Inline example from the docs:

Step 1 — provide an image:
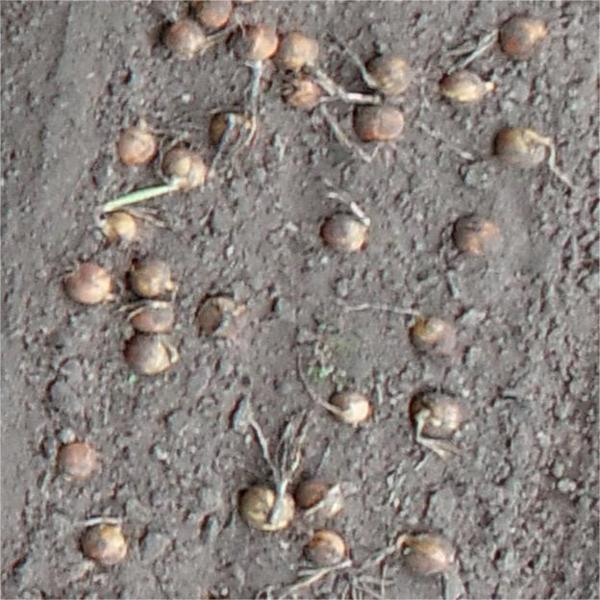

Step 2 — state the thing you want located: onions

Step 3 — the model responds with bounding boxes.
[233,25,277,62]
[284,75,320,111]
[499,127,546,165]
[277,31,318,69]
[320,209,366,251]
[129,300,172,333]
[326,388,367,424]
[240,484,293,529]
[353,101,400,141]
[100,210,136,244]
[454,215,497,257]
[162,146,201,185]
[212,112,248,150]
[367,51,409,95]
[127,336,177,375]
[401,532,451,579]
[166,19,206,58]
[130,259,171,297]
[80,519,125,563]
[65,262,110,304]
[296,476,326,507]
[499,13,547,58]
[414,392,466,437]
[304,529,344,566]
[56,440,98,481]
[115,126,154,164]
[196,0,229,33]
[443,69,483,105]
[409,312,449,349]
[198,298,232,333]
